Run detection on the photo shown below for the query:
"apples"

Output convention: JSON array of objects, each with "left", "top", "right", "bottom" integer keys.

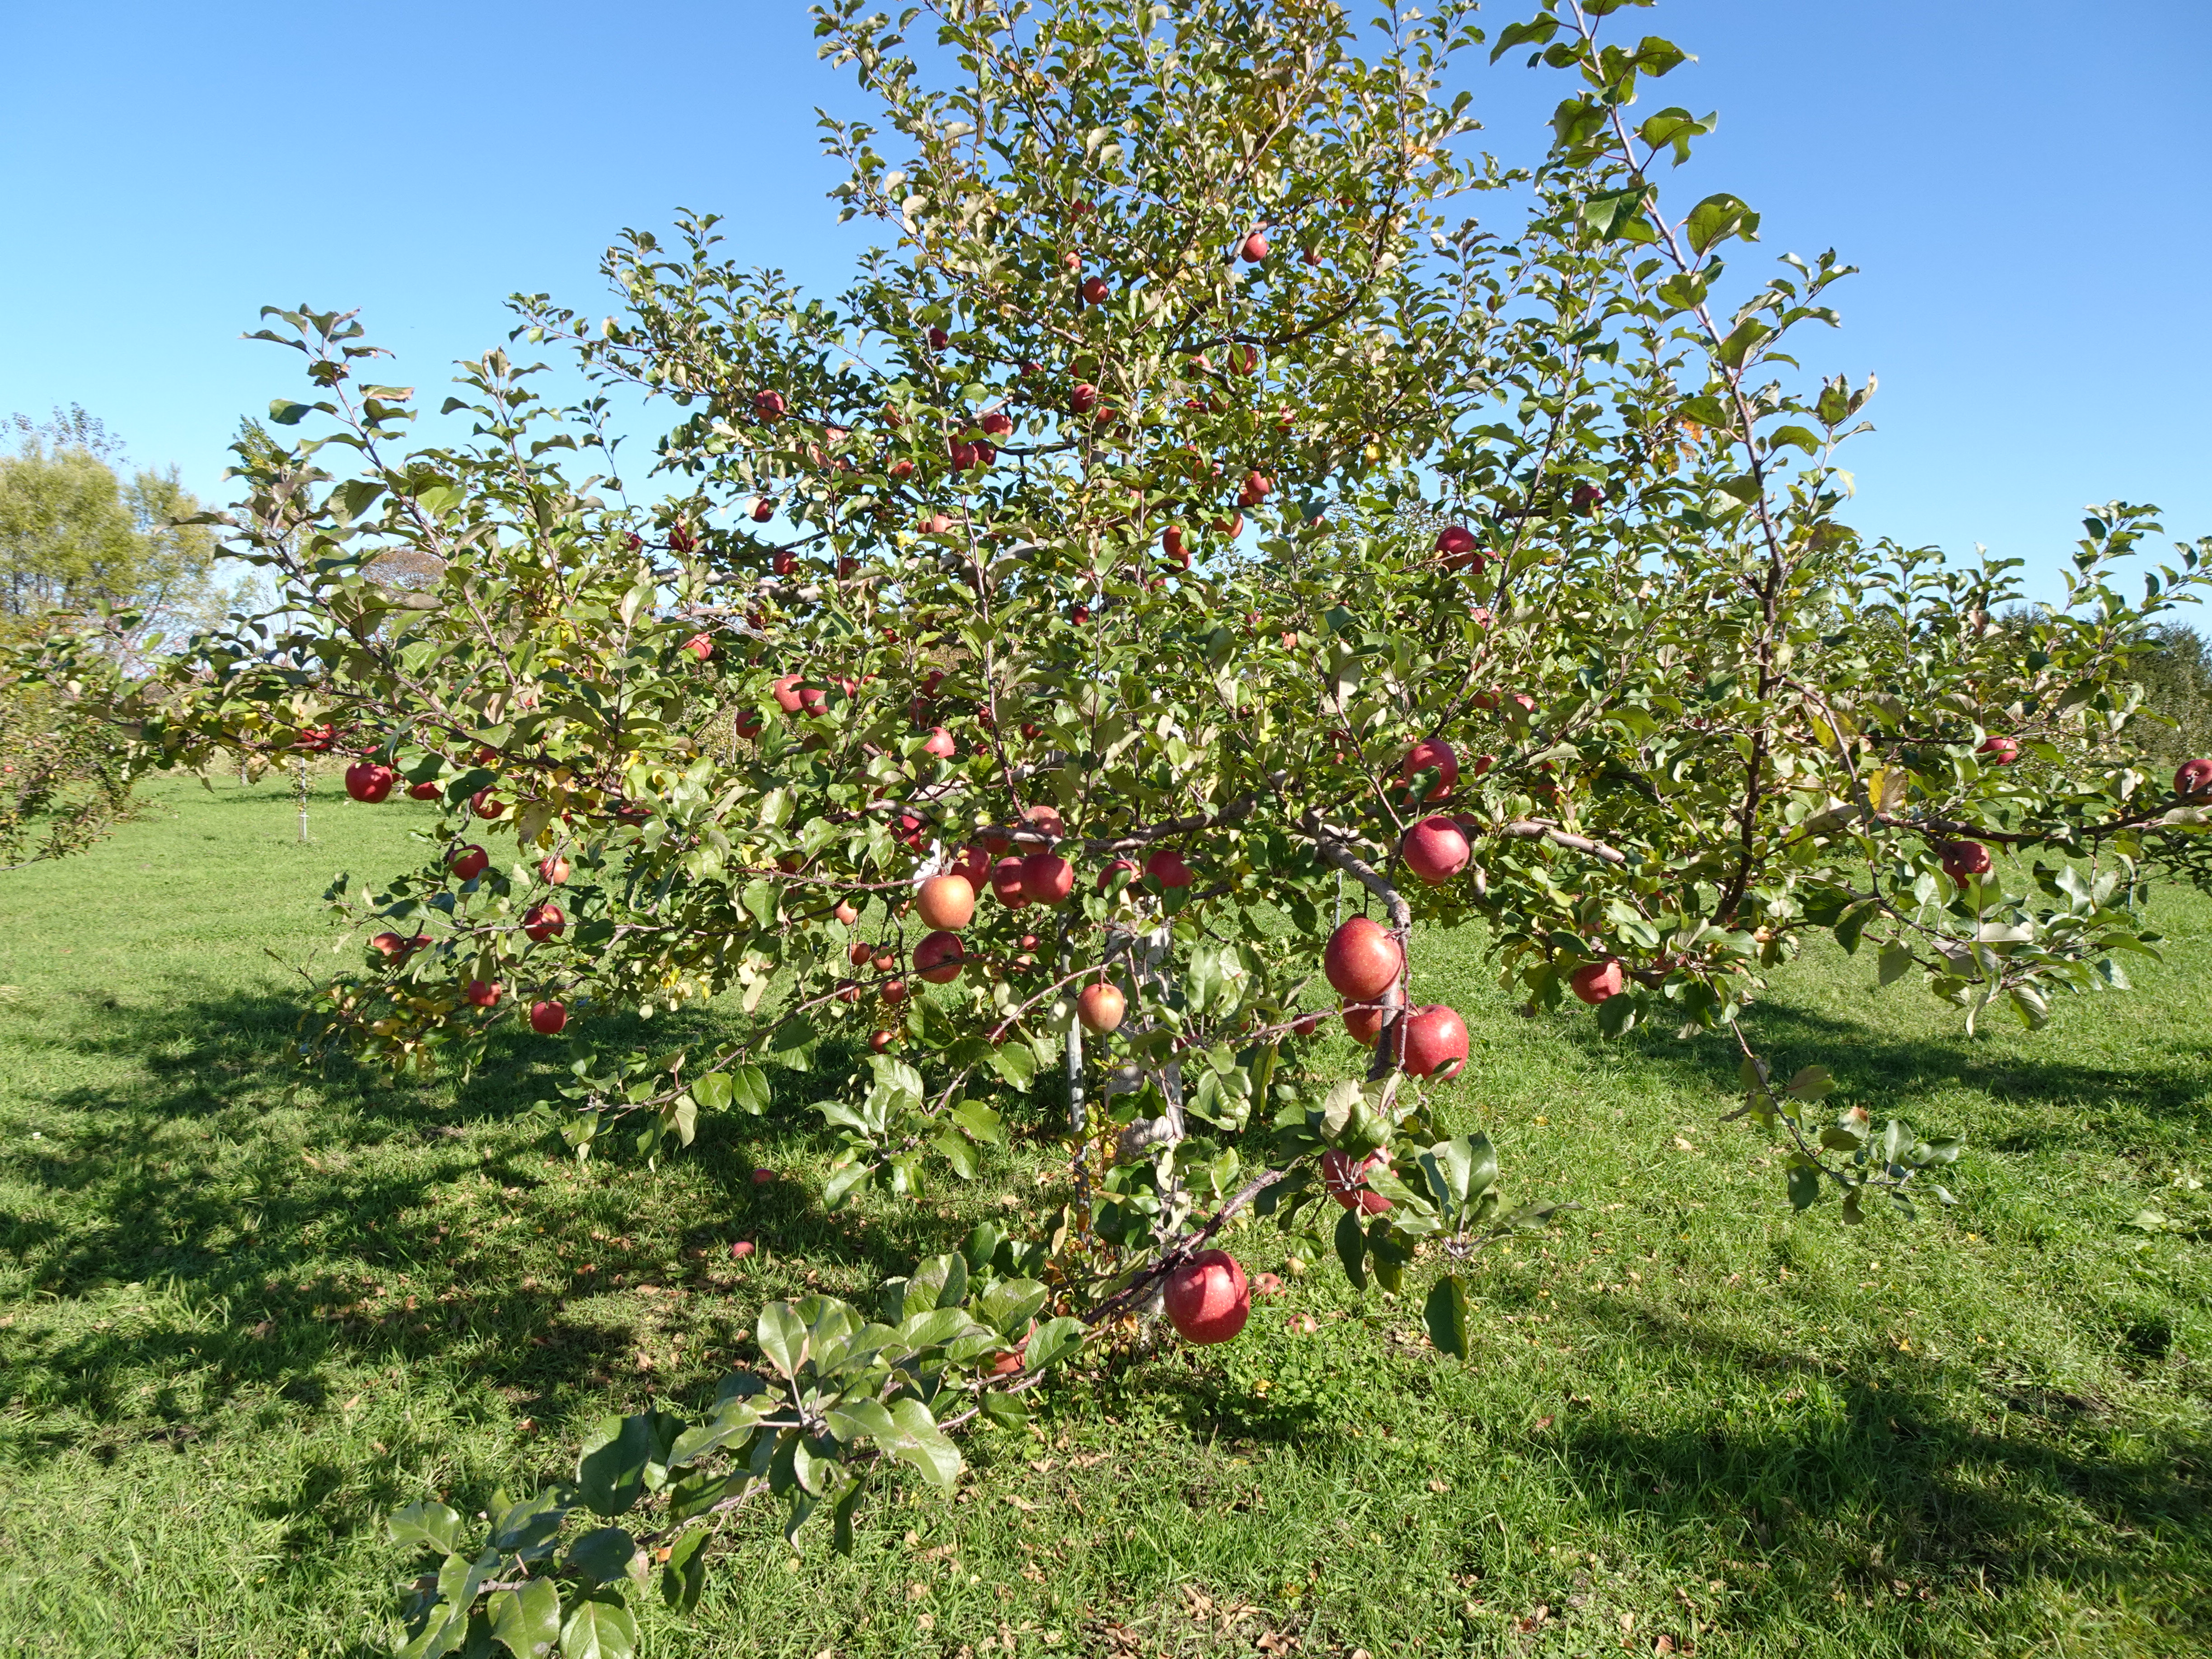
[
  {"left": 1146, "top": 847, "right": 1196, "bottom": 900},
  {"left": 465, "top": 685, "right": 475, "bottom": 695},
  {"left": 925, "top": 326, "right": 950, "bottom": 352},
  {"left": 1094, "top": 390, "right": 1121, "bottom": 422},
  {"left": 1272, "top": 621, "right": 1311, "bottom": 663},
  {"left": 1239, "top": 233, "right": 1268, "bottom": 265},
  {"left": 619, "top": 795, "right": 658, "bottom": 838},
  {"left": 771, "top": 670, "right": 815, "bottom": 717},
  {"left": 1022, "top": 934, "right": 1040, "bottom": 951},
  {"left": 1648, "top": 942, "right": 1687, "bottom": 969},
  {"left": 750, "top": 497, "right": 777, "bottom": 523},
  {"left": 977, "top": 822, "right": 1017, "bottom": 854},
  {"left": 1242, "top": 461, "right": 1279, "bottom": 495},
  {"left": 1502, "top": 695, "right": 1535, "bottom": 729},
  {"left": 1569, "top": 761, "right": 1594, "bottom": 790},
  {"left": 346, "top": 760, "right": 394, "bottom": 803},
  {"left": 1692, "top": 713, "right": 1721, "bottom": 733},
  {"left": 867, "top": 1025, "right": 899, "bottom": 1055},
  {"left": 1473, "top": 753, "right": 1500, "bottom": 779},
  {"left": 1243, "top": 607, "right": 1274, "bottom": 641},
  {"left": 1569, "top": 950, "right": 1623, "bottom": 1007},
  {"left": 581, "top": 1260, "right": 600, "bottom": 1279},
  {"left": 1976, "top": 735, "right": 2018, "bottom": 767},
  {"left": 1073, "top": 1210, "right": 1105, "bottom": 1238},
  {"left": 530, "top": 999, "right": 567, "bottom": 1034},
  {"left": 1162, "top": 522, "right": 1198, "bottom": 560},
  {"left": 1301, "top": 241, "right": 1324, "bottom": 267},
  {"left": 1661, "top": 888, "right": 1687, "bottom": 915},
  {"left": 1903, "top": 769, "right": 1934, "bottom": 796},
  {"left": 915, "top": 517, "right": 942, "bottom": 539},
  {"left": 1236, "top": 482, "right": 1262, "bottom": 515},
  {"left": 1591, "top": 759, "right": 1612, "bottom": 780},
  {"left": 676, "top": 628, "right": 713, "bottom": 661},
  {"left": 1446, "top": 810, "right": 1480, "bottom": 844},
  {"left": 1684, "top": 664, "right": 1709, "bottom": 683},
  {"left": 578, "top": 790, "right": 603, "bottom": 811},
  {"left": 1286, "top": 1313, "right": 1318, "bottom": 1346},
  {"left": 1942, "top": 841, "right": 1991, "bottom": 891},
  {"left": 1018, "top": 853, "right": 1074, "bottom": 906},
  {"left": 1071, "top": 382, "right": 1104, "bottom": 415},
  {"left": 1053, "top": 964, "right": 1077, "bottom": 989},
  {"left": 780, "top": 883, "right": 805, "bottom": 910},
  {"left": 554, "top": 805, "right": 580, "bottom": 823},
  {"left": 1471, "top": 549, "right": 1511, "bottom": 589},
  {"left": 969, "top": 736, "right": 999, "bottom": 762},
  {"left": 824, "top": 454, "right": 852, "bottom": 484},
  {"left": 1415, "top": 862, "right": 1448, "bottom": 889},
  {"left": 1363, "top": 430, "right": 1383, "bottom": 460},
  {"left": 447, "top": 844, "right": 491, "bottom": 884},
  {"left": 1025, "top": 907, "right": 1044, "bottom": 925},
  {"left": 1330, "top": 746, "right": 1364, "bottom": 773},
  {"left": 406, "top": 778, "right": 449, "bottom": 800},
  {"left": 1469, "top": 649, "right": 1498, "bottom": 676},
  {"left": 994, "top": 856, "right": 1034, "bottom": 910},
  {"left": 479, "top": 741, "right": 511, "bottom": 772},
  {"left": 1020, "top": 709, "right": 1049, "bottom": 743},
  {"left": 920, "top": 669, "right": 955, "bottom": 705},
  {"left": 882, "top": 400, "right": 917, "bottom": 429},
  {"left": 912, "top": 727, "right": 957, "bottom": 770},
  {"left": 1322, "top": 1139, "right": 1404, "bottom": 1217},
  {"left": 827, "top": 886, "right": 863, "bottom": 929},
  {"left": 1082, "top": 276, "right": 1111, "bottom": 307},
  {"left": 1119, "top": 489, "right": 1148, "bottom": 515},
  {"left": 845, "top": 939, "right": 872, "bottom": 967},
  {"left": 817, "top": 424, "right": 852, "bottom": 451},
  {"left": 1096, "top": 857, "right": 1144, "bottom": 908},
  {"left": 879, "top": 811, "right": 935, "bottom": 859},
  {"left": 1176, "top": 352, "right": 1214, "bottom": 390},
  {"left": 414, "top": 933, "right": 432, "bottom": 953},
  {"left": 1053, "top": 248, "right": 1082, "bottom": 281},
  {"left": 882, "top": 447, "right": 919, "bottom": 478},
  {"left": 1082, "top": 569, "right": 1106, "bottom": 591},
  {"left": 871, "top": 945, "right": 896, "bottom": 972},
  {"left": 1163, "top": 1248, "right": 1252, "bottom": 1345},
  {"left": 953, "top": 840, "right": 996, "bottom": 891},
  {"left": 1457, "top": 606, "right": 1493, "bottom": 638},
  {"left": 1687, "top": 645, "right": 1709, "bottom": 661},
  {"left": 879, "top": 978, "right": 904, "bottom": 1006},
  {"left": 754, "top": 389, "right": 785, "bottom": 423},
  {"left": 1070, "top": 353, "right": 1099, "bottom": 383},
  {"left": 966, "top": 948, "right": 993, "bottom": 969},
  {"left": 1753, "top": 924, "right": 1774, "bottom": 945},
  {"left": 800, "top": 671, "right": 856, "bottom": 723},
  {"left": 880, "top": 624, "right": 900, "bottom": 647},
  {"left": 1538, "top": 754, "right": 1565, "bottom": 778},
  {"left": 1645, "top": 870, "right": 1676, "bottom": 896},
  {"left": 1542, "top": 546, "right": 1564, "bottom": 567},
  {"left": 1323, "top": 919, "right": 1404, "bottom": 1005},
  {"left": 359, "top": 743, "right": 406, "bottom": 781},
  {"left": 465, "top": 978, "right": 504, "bottom": 1007},
  {"left": 1005, "top": 1314, "right": 1037, "bottom": 1350},
  {"left": 1290, "top": 1012, "right": 1318, "bottom": 1036},
  {"left": 975, "top": 705, "right": 1010, "bottom": 736},
  {"left": 1405, "top": 738, "right": 1458, "bottom": 803},
  {"left": 850, "top": 587, "right": 882, "bottom": 612},
  {"left": 1212, "top": 1009, "right": 1251, "bottom": 1042},
  {"left": 472, "top": 786, "right": 509, "bottom": 820},
  {"left": 516, "top": 1415, "right": 544, "bottom": 1437},
  {"left": 1067, "top": 194, "right": 1104, "bottom": 231},
  {"left": 1176, "top": 1033, "right": 1201, "bottom": 1057},
  {"left": 1719, "top": 947, "right": 1745, "bottom": 973},
  {"left": 945, "top": 440, "right": 981, "bottom": 473},
  {"left": 1473, "top": 684, "right": 1501, "bottom": 712},
  {"left": 1141, "top": 568, "right": 1168, "bottom": 597},
  {"left": 1234, "top": 407, "right": 1268, "bottom": 442},
  {"left": 856, "top": 763, "right": 880, "bottom": 789},
  {"left": 982, "top": 412, "right": 1013, "bottom": 445},
  {"left": 837, "top": 984, "right": 862, "bottom": 1008},
  {"left": 912, "top": 927, "right": 966, "bottom": 985},
  {"left": 1230, "top": 704, "right": 1253, "bottom": 722},
  {"left": 956, "top": 563, "right": 991, "bottom": 594},
  {"left": 1401, "top": 815, "right": 1470, "bottom": 883},
  {"left": 1275, "top": 401, "right": 1310, "bottom": 442},
  {"left": 366, "top": 932, "right": 406, "bottom": 967},
  {"left": 1390, "top": 776, "right": 1415, "bottom": 807},
  {"left": 1537, "top": 783, "right": 1572, "bottom": 808},
  {"left": 751, "top": 1165, "right": 777, "bottom": 1193},
  {"left": 776, "top": 852, "right": 808, "bottom": 875},
  {"left": 447, "top": 684, "right": 458, "bottom": 694},
  {"left": 2174, "top": 758, "right": 2212, "bottom": 809},
  {"left": 522, "top": 904, "right": 566, "bottom": 945},
  {"left": 1115, "top": 1316, "right": 1148, "bottom": 1344},
  {"left": 1336, "top": 597, "right": 1353, "bottom": 612},
  {"left": 1134, "top": 351, "right": 1159, "bottom": 374},
  {"left": 1725, "top": 907, "right": 1749, "bottom": 931},
  {"left": 981, "top": 1337, "right": 1036, "bottom": 1390},
  {"left": 1403, "top": 137, "right": 1435, "bottom": 166},
  {"left": 893, "top": 892, "right": 916, "bottom": 918},
  {"left": 1559, "top": 894, "right": 1603, "bottom": 936},
  {"left": 1182, "top": 399, "right": 1210, "bottom": 431},
  {"left": 1038, "top": 1260, "right": 1070, "bottom": 1283},
  {"left": 620, "top": 530, "right": 643, "bottom": 549},
  {"left": 1486, "top": 293, "right": 1508, "bottom": 314},
  {"left": 1393, "top": 1004, "right": 1470, "bottom": 1084},
  {"left": 908, "top": 696, "right": 940, "bottom": 729},
  {"left": 979, "top": 1019, "right": 1008, "bottom": 1052},
  {"left": 1191, "top": 463, "right": 1225, "bottom": 490},
  {"left": 728, "top": 1239, "right": 757, "bottom": 1266},
  {"left": 299, "top": 717, "right": 336, "bottom": 753},
  {"left": 744, "top": 595, "right": 787, "bottom": 630},
  {"left": 914, "top": 601, "right": 949, "bottom": 631},
  {"left": 348, "top": 716, "right": 370, "bottom": 734},
  {"left": 869, "top": 784, "right": 901, "bottom": 811},
  {"left": 520, "top": 692, "right": 538, "bottom": 710},
  {"left": 1227, "top": 344, "right": 1259, "bottom": 379},
  {"left": 731, "top": 710, "right": 766, "bottom": 740},
  {"left": 1570, "top": 483, "right": 1608, "bottom": 521},
  {"left": 1018, "top": 802, "right": 1065, "bottom": 859},
  {"left": 1076, "top": 981, "right": 1126, "bottom": 1036},
  {"left": 927, "top": 515, "right": 954, "bottom": 541},
  {"left": 771, "top": 549, "right": 800, "bottom": 578},
  {"left": 1209, "top": 510, "right": 1244, "bottom": 541},
  {"left": 992, "top": 954, "right": 1033, "bottom": 984},
  {"left": 988, "top": 525, "right": 1010, "bottom": 543},
  {"left": 1177, "top": 445, "right": 1204, "bottom": 481},
  {"left": 851, "top": 674, "right": 887, "bottom": 708},
  {"left": 540, "top": 855, "right": 571, "bottom": 886},
  {"left": 1296, "top": 514, "right": 1329, "bottom": 542},
  {"left": 1069, "top": 606, "right": 1095, "bottom": 628},
  {"left": 1055, "top": 1294, "right": 1085, "bottom": 1325},
  {"left": 791, "top": 442, "right": 831, "bottom": 472},
  {"left": 667, "top": 527, "right": 704, "bottom": 559},
  {"left": 1252, "top": 1274, "right": 1286, "bottom": 1309},
  {"left": 1343, "top": 985, "right": 1407, "bottom": 1049},
  {"left": 834, "top": 556, "right": 862, "bottom": 580},
  {"left": 915, "top": 872, "right": 976, "bottom": 932},
  {"left": 1432, "top": 526, "right": 1477, "bottom": 574},
  {"left": 1021, "top": 362, "right": 1050, "bottom": 391}
]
